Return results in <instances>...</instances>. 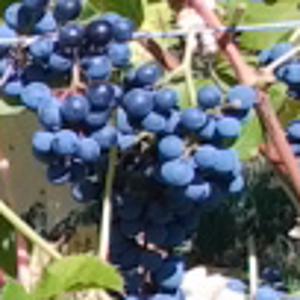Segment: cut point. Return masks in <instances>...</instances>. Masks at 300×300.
Returning a JSON list of instances; mask_svg holds the SVG:
<instances>
[{
	"label": "cut point",
	"instance_id": "obj_1",
	"mask_svg": "<svg viewBox=\"0 0 300 300\" xmlns=\"http://www.w3.org/2000/svg\"><path fill=\"white\" fill-rule=\"evenodd\" d=\"M199 28H206V22L195 23L188 31V36L185 41V59H184V79L183 82L186 86L189 101L191 106L197 105V96L195 94V87L193 80L191 79V61H192V43L194 41L195 34Z\"/></svg>",
	"mask_w": 300,
	"mask_h": 300
}]
</instances>
